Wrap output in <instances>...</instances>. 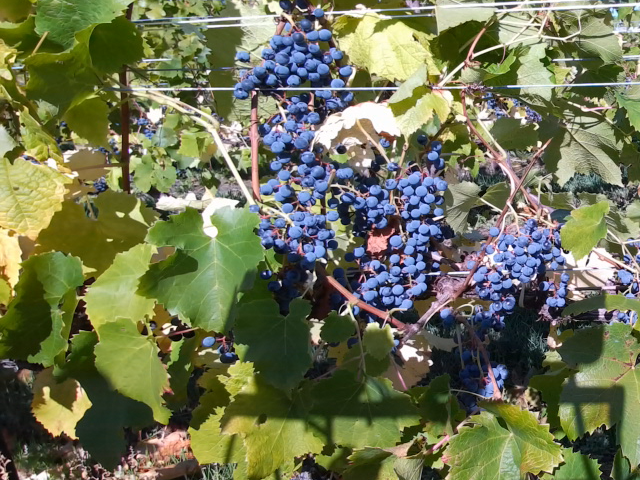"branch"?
<instances>
[{
  "label": "branch",
  "instance_id": "1",
  "mask_svg": "<svg viewBox=\"0 0 640 480\" xmlns=\"http://www.w3.org/2000/svg\"><path fill=\"white\" fill-rule=\"evenodd\" d=\"M136 99H140L142 101H147L152 104H157L162 107L171 109L172 111H176L182 113L186 118H190L197 123H199L214 139V143L216 146L217 152L223 157V159L227 162L231 175L235 180V183L239 186V189L242 191L245 196L247 203L249 205H253L254 203H258L260 201V165H259V140L257 135V105H256V92L251 90L249 92V107H250V134H249V142L252 144V167H253V195L250 193L246 184L243 182L240 174L236 168L235 162L232 157L227 153V151L223 148L222 141L219 137V134L214 128L201 116L198 114L188 111L184 106L174 104L173 102L164 100L160 97H154L149 94H144L142 92H136L134 94Z\"/></svg>",
  "mask_w": 640,
  "mask_h": 480
},
{
  "label": "branch",
  "instance_id": "2",
  "mask_svg": "<svg viewBox=\"0 0 640 480\" xmlns=\"http://www.w3.org/2000/svg\"><path fill=\"white\" fill-rule=\"evenodd\" d=\"M461 111H462V116L464 118V121L466 123V125L468 126V128L470 129L471 133L485 146V148L494 155L495 158L499 159V161L502 163V165L507 169L508 173L510 174V177L513 181V183L515 184V188L513 189L509 199L506 201L505 205L503 206V208L501 209V211L499 212L497 218H496V222H495V226L499 227L501 224V220L504 217L505 213L507 212V210L509 209V207L511 206V204L513 203V201L516 198L517 193L520 191L521 194L527 199V201L530 204V207L533 208L535 211H539L540 207L535 204V201L533 200V198L530 196V194L522 187L523 182L525 181L528 173L530 172V170L533 168V166L535 165L537 159L540 157V155L542 154V152L547 148V146L551 143V141L553 140L552 136H549L546 138V140L543 142V144L539 147V149L535 152V154L533 155L531 161L529 162V164L526 166V168L524 169L520 179H517V176L515 175V172L513 170V168L509 165V163L506 161V159L497 152L496 149H494L476 130V128L474 127L473 123L470 121V118L467 114V109H466V90L465 91H461Z\"/></svg>",
  "mask_w": 640,
  "mask_h": 480
},
{
  "label": "branch",
  "instance_id": "3",
  "mask_svg": "<svg viewBox=\"0 0 640 480\" xmlns=\"http://www.w3.org/2000/svg\"><path fill=\"white\" fill-rule=\"evenodd\" d=\"M313 266L315 270L323 276L324 280L331 287H334L336 290L340 291L352 304L356 306H360L372 314H377L382 319L394 324L395 326H398L399 328H404L406 326V323L404 321H401L397 317L390 315L389 313L385 312L383 309L370 305L365 300L358 299L357 297H355L347 288H345L342 284L334 280L330 276L329 272L318 261H315L313 263Z\"/></svg>",
  "mask_w": 640,
  "mask_h": 480
},
{
  "label": "branch",
  "instance_id": "4",
  "mask_svg": "<svg viewBox=\"0 0 640 480\" xmlns=\"http://www.w3.org/2000/svg\"><path fill=\"white\" fill-rule=\"evenodd\" d=\"M530 40H559V41H564L565 37L561 36V35H527L526 37L520 38V39H516V40H512L509 41L507 43L504 44H498L495 47H489L487 49L484 50H480L477 51L476 53H473L469 58H467L464 62L458 64L454 70H452L444 79L441 83L437 84L438 88H443L446 86V84L450 81V79L456 75L462 68L466 67L467 65H469L474 59L481 57L483 55L486 54H490L491 52H497L500 49H506L509 48L511 46L514 45H519L525 42H528Z\"/></svg>",
  "mask_w": 640,
  "mask_h": 480
},
{
  "label": "branch",
  "instance_id": "5",
  "mask_svg": "<svg viewBox=\"0 0 640 480\" xmlns=\"http://www.w3.org/2000/svg\"><path fill=\"white\" fill-rule=\"evenodd\" d=\"M485 253L481 252L477 258L475 263L472 265L470 271H469V275L465 277L463 283L460 285V287L456 290V293L454 294L455 298H459L461 293L464 291V289L467 287V285L470 282L471 277L474 275L476 269L478 268V266L480 265L482 259L484 258Z\"/></svg>",
  "mask_w": 640,
  "mask_h": 480
},
{
  "label": "branch",
  "instance_id": "6",
  "mask_svg": "<svg viewBox=\"0 0 640 480\" xmlns=\"http://www.w3.org/2000/svg\"><path fill=\"white\" fill-rule=\"evenodd\" d=\"M290 15H291V12H290L288 9H285V10L281 13L280 25H279V26H277V29H276V33H277V34H280V33H281V31H282V29L284 28V25H285V23H286L287 16H290Z\"/></svg>",
  "mask_w": 640,
  "mask_h": 480
}]
</instances>
